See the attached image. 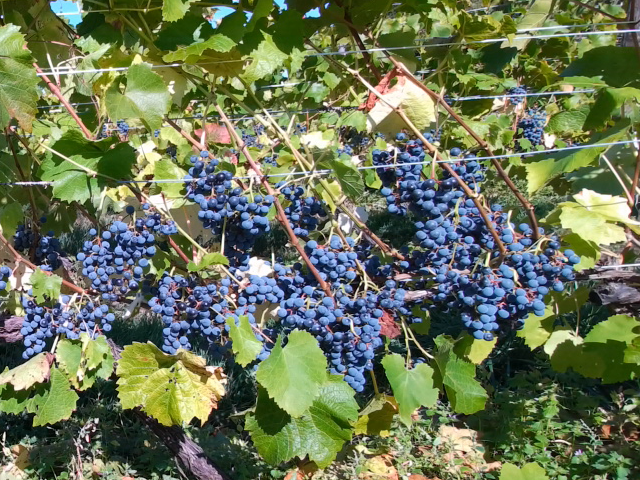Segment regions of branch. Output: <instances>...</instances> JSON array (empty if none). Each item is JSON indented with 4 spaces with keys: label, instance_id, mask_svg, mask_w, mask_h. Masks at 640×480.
<instances>
[{
    "label": "branch",
    "instance_id": "obj_1",
    "mask_svg": "<svg viewBox=\"0 0 640 480\" xmlns=\"http://www.w3.org/2000/svg\"><path fill=\"white\" fill-rule=\"evenodd\" d=\"M226 68H228V70L233 74V76L238 79L246 88L247 92L249 93V95L254 99V101L259 105V107L261 108L262 112L264 113L265 117L267 118V120L277 129L274 130L272 129L269 124L262 118L260 117L256 112H254L253 110H251L247 105H245L243 102H241L239 99H237L235 96L232 95L231 92H229L227 89H225L224 87L220 86L218 83L206 80L202 77H198L192 74H189L184 68L182 67H178L177 71L180 72L184 77H186V79L191 82L193 85H195L209 100L211 103H213L215 109L218 112V115L221 117L222 121L225 123L227 129L230 131V133L232 134L235 142L238 144L241 154L244 155L247 160L251 163V165L253 166V168L255 169V172L257 174H262L263 171L260 169L259 165L257 164L256 160L252 158V155L250 153V151L248 150L247 147L244 146L243 141L240 139V137L237 134V131L234 129V127L232 126V124L230 123V121L228 120L226 114L223 112L221 106L219 105V102L217 101L216 98H214L209 91L202 85L200 84L197 80L202 81L206 84L209 85H213L215 87H217L218 89H220L221 91L225 92L226 95H228L232 100H234L238 105H241L243 108L246 109V111H248L250 114H252L253 116H255L258 120L259 123L272 135H275L289 150L290 152L293 154V156L295 157V159L297 160V162L300 165V168L302 171H306V168L308 170H313L316 169L315 166H312L304 157H302L298 151L294 148V146L292 145L289 137L286 135L285 131L278 125L276 124V122L270 117V115L267 113L264 105L260 102V100L255 96V94L252 92V90L250 89L249 85L245 82V80L240 77L233 68H231V66L228 63H225Z\"/></svg>",
    "mask_w": 640,
    "mask_h": 480
},
{
    "label": "branch",
    "instance_id": "obj_2",
    "mask_svg": "<svg viewBox=\"0 0 640 480\" xmlns=\"http://www.w3.org/2000/svg\"><path fill=\"white\" fill-rule=\"evenodd\" d=\"M327 59H329L331 62L335 63L336 65H338L343 71L352 74L353 76H355V78L363 85L366 86L371 93L378 99L380 100L384 105H386L391 111L395 112L398 116H400L403 121L407 124V126L409 128L412 129L413 132H415V134L418 136V138L421 140V142L433 152V155L435 156V160H443L442 155L440 154V150L435 147L434 145H432L422 134V132L419 130L418 127H416L411 120L405 115V113L403 111H401L399 108H397L396 106H394L389 100H387L383 95H381L374 86H372L369 82H367L355 69H352L346 65H344L340 60H338L336 57L334 56H326Z\"/></svg>",
    "mask_w": 640,
    "mask_h": 480
},
{
    "label": "branch",
    "instance_id": "obj_3",
    "mask_svg": "<svg viewBox=\"0 0 640 480\" xmlns=\"http://www.w3.org/2000/svg\"><path fill=\"white\" fill-rule=\"evenodd\" d=\"M384 57L389 61V63L392 65V67L394 68V70L398 73H401L402 75L406 76L415 86H417L420 90L430 94L433 98L436 99L437 102H439L442 106H444L447 110V112L449 113V115L458 122L459 125H461V127L470 134V136L472 138L475 139V141L481 146V148L487 153V154H492L493 151L484 143L483 140H481L480 136L478 134H476L464 121L462 118H460L452 109V107L450 106V104L448 102H446L445 100H443L433 89H430L428 87H426L425 85H423L421 82H419L409 71L400 68L398 66V64L394 61V59L391 57V55L388 52H383Z\"/></svg>",
    "mask_w": 640,
    "mask_h": 480
},
{
    "label": "branch",
    "instance_id": "obj_4",
    "mask_svg": "<svg viewBox=\"0 0 640 480\" xmlns=\"http://www.w3.org/2000/svg\"><path fill=\"white\" fill-rule=\"evenodd\" d=\"M261 182L264 184L265 189L269 192L270 195H273L274 199H275V207L281 217V222L285 228V230L287 231L288 236L290 237L293 246L298 250V252L300 253L303 261L306 264V267L312 272V274L315 276V278L318 280V282L321 284V286L325 289V291L328 293L329 296H333L334 292L332 291V289L328 286V284L323 280V278L321 277V275L319 274V272L312 266L308 256L306 255L303 247L298 243V240L296 239L292 229L290 228L287 219H286V215L285 212L282 208V206L280 205V197L278 195V193L273 190L270 186L269 181L264 178L261 179Z\"/></svg>",
    "mask_w": 640,
    "mask_h": 480
},
{
    "label": "branch",
    "instance_id": "obj_5",
    "mask_svg": "<svg viewBox=\"0 0 640 480\" xmlns=\"http://www.w3.org/2000/svg\"><path fill=\"white\" fill-rule=\"evenodd\" d=\"M314 177L319 181V183L322 185L324 190L328 193L332 201L335 202L343 210V212L352 220L355 226L360 230H363L365 233H367L373 241H375L381 246L380 247L381 251H384L387 255H391L396 259H401L403 261L408 260V257L406 255L395 252L392 248L388 246L387 243H385L382 239L376 236L371 229L361 224L358 221V219L355 217V215L347 208V206L335 196L331 188L328 186L327 182L320 176V174H315Z\"/></svg>",
    "mask_w": 640,
    "mask_h": 480
},
{
    "label": "branch",
    "instance_id": "obj_6",
    "mask_svg": "<svg viewBox=\"0 0 640 480\" xmlns=\"http://www.w3.org/2000/svg\"><path fill=\"white\" fill-rule=\"evenodd\" d=\"M442 168H444L448 173L452 174L459 182V184L464 188L465 192L469 194V196L473 199L474 204L476 205V207L478 208V210L481 212V216L484 220V222L486 223L490 233L492 234L493 238L496 240L501 252L503 256L507 255V250L506 247L503 243V241L501 240L500 236L498 235V233L495 231L492 222L490 221L489 217L487 216L486 210L483 207V205L480 203L478 196L473 192L472 189H470V187L467 185V183L463 180L462 176L453 168L449 167V165H441Z\"/></svg>",
    "mask_w": 640,
    "mask_h": 480
},
{
    "label": "branch",
    "instance_id": "obj_7",
    "mask_svg": "<svg viewBox=\"0 0 640 480\" xmlns=\"http://www.w3.org/2000/svg\"><path fill=\"white\" fill-rule=\"evenodd\" d=\"M492 164L494 165L495 168H497V170L500 172V174L502 175V177L504 178L505 182L507 183V185L509 186V188L511 189V191L516 195V197L521 201V203L525 206V209L527 210V214H528V218H529V223L531 225L533 234H532V238L534 240H539L540 239V231H539V226H538V219L536 216V213L533 209V205L528 202L523 196L522 194L519 192V190L515 187V185L513 184L512 180L510 179L509 175L507 174V172L503 169V167L498 163L497 159H492Z\"/></svg>",
    "mask_w": 640,
    "mask_h": 480
},
{
    "label": "branch",
    "instance_id": "obj_8",
    "mask_svg": "<svg viewBox=\"0 0 640 480\" xmlns=\"http://www.w3.org/2000/svg\"><path fill=\"white\" fill-rule=\"evenodd\" d=\"M42 80L49 85V88L58 96L60 102L65 106L66 110L69 112L71 119L77 123L83 130L84 134L86 135V137L88 139L92 138V135L89 131V129L87 128L86 124L76 116L75 111L73 110V108L71 107V105L69 104V102L65 99L64 95L62 94V92L60 90H58L57 85L51 81L47 76H43Z\"/></svg>",
    "mask_w": 640,
    "mask_h": 480
},
{
    "label": "branch",
    "instance_id": "obj_9",
    "mask_svg": "<svg viewBox=\"0 0 640 480\" xmlns=\"http://www.w3.org/2000/svg\"><path fill=\"white\" fill-rule=\"evenodd\" d=\"M310 189L313 192V194L315 195V198L320 202L322 208L324 209L325 213L328 215L329 219L331 220L335 230L337 231V233L339 234V236L342 239V243L344 244V246L348 249L349 252H352V248L349 246V244L347 243V241L345 240V237L342 233V231L340 230V228L338 227V225L336 224L335 219L333 218L332 214L329 212L328 208L325 206L323 199L318 195L316 189L314 188L313 185H310Z\"/></svg>",
    "mask_w": 640,
    "mask_h": 480
},
{
    "label": "branch",
    "instance_id": "obj_10",
    "mask_svg": "<svg viewBox=\"0 0 640 480\" xmlns=\"http://www.w3.org/2000/svg\"><path fill=\"white\" fill-rule=\"evenodd\" d=\"M0 240L2 241V243L7 247V249L9 250V252L16 258L18 259L21 263H23L26 267L30 268L31 270H36L37 266L32 264L31 262H29L27 259H25L22 255H20L18 252H16V250L13 248V246L11 245V243L5 238V236L3 234H0Z\"/></svg>",
    "mask_w": 640,
    "mask_h": 480
},
{
    "label": "branch",
    "instance_id": "obj_11",
    "mask_svg": "<svg viewBox=\"0 0 640 480\" xmlns=\"http://www.w3.org/2000/svg\"><path fill=\"white\" fill-rule=\"evenodd\" d=\"M166 123L169 124L173 129H175L179 133V135L182 136L189 143L195 145L199 150L203 149L202 144L198 140L193 139L187 133H185L183 129L179 125H177L172 119H167Z\"/></svg>",
    "mask_w": 640,
    "mask_h": 480
},
{
    "label": "branch",
    "instance_id": "obj_12",
    "mask_svg": "<svg viewBox=\"0 0 640 480\" xmlns=\"http://www.w3.org/2000/svg\"><path fill=\"white\" fill-rule=\"evenodd\" d=\"M74 205L81 210L84 216L92 223V225L99 231H103L104 227L100 225V222L97 221L86 209L84 205H82L79 201H75Z\"/></svg>",
    "mask_w": 640,
    "mask_h": 480
},
{
    "label": "branch",
    "instance_id": "obj_13",
    "mask_svg": "<svg viewBox=\"0 0 640 480\" xmlns=\"http://www.w3.org/2000/svg\"><path fill=\"white\" fill-rule=\"evenodd\" d=\"M345 21H346V23H347V25L349 27L350 32L352 33L353 40L356 43V45L358 46V48L359 49L360 48H364L362 42L360 41V39L358 37L357 31L355 30V27H354V25H353V23L351 21V18L349 16H346L345 17Z\"/></svg>",
    "mask_w": 640,
    "mask_h": 480
},
{
    "label": "branch",
    "instance_id": "obj_14",
    "mask_svg": "<svg viewBox=\"0 0 640 480\" xmlns=\"http://www.w3.org/2000/svg\"><path fill=\"white\" fill-rule=\"evenodd\" d=\"M166 240L171 244L172 248L174 249V251L186 262L189 263L190 262V258L184 254V252L179 248V246L177 245V243L175 242V240L173 238H171L170 236L166 237Z\"/></svg>",
    "mask_w": 640,
    "mask_h": 480
},
{
    "label": "branch",
    "instance_id": "obj_15",
    "mask_svg": "<svg viewBox=\"0 0 640 480\" xmlns=\"http://www.w3.org/2000/svg\"><path fill=\"white\" fill-rule=\"evenodd\" d=\"M61 283L63 285H65V286L69 287L70 289H72V290H74L76 292H79L81 294H84V295H89L90 294L89 290H86V289H83L81 287H78V286L74 285L72 282H70V281H68L66 279H62Z\"/></svg>",
    "mask_w": 640,
    "mask_h": 480
},
{
    "label": "branch",
    "instance_id": "obj_16",
    "mask_svg": "<svg viewBox=\"0 0 640 480\" xmlns=\"http://www.w3.org/2000/svg\"><path fill=\"white\" fill-rule=\"evenodd\" d=\"M364 58L366 60V63L369 65V67L371 68V70L373 71L375 77L378 80L382 79V76L380 74V72L378 71V69L376 68L375 64L373 63V61L371 60L369 53H364Z\"/></svg>",
    "mask_w": 640,
    "mask_h": 480
},
{
    "label": "branch",
    "instance_id": "obj_17",
    "mask_svg": "<svg viewBox=\"0 0 640 480\" xmlns=\"http://www.w3.org/2000/svg\"><path fill=\"white\" fill-rule=\"evenodd\" d=\"M355 264H356L357 268L362 271L363 276L367 280V282L370 283L372 287H375L374 281H372L370 279V277L366 273V267L364 265H360L358 260H355Z\"/></svg>",
    "mask_w": 640,
    "mask_h": 480
}]
</instances>
